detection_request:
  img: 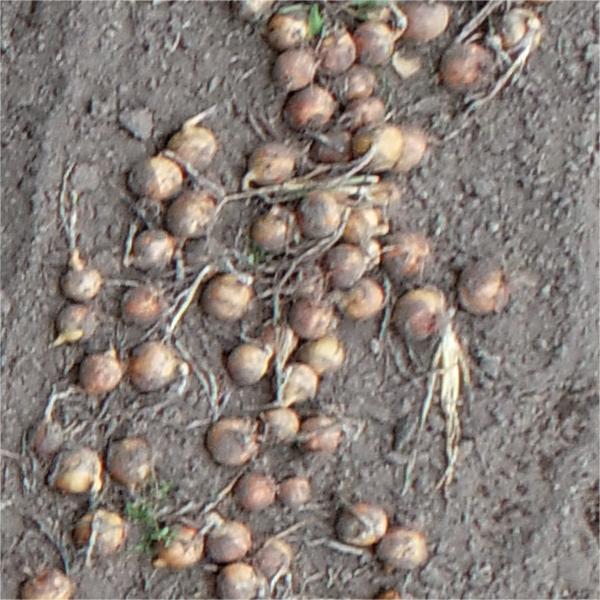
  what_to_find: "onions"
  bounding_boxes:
[52,304,99,343]
[391,284,446,344]
[203,274,253,322]
[251,207,294,250]
[263,323,298,356]
[492,8,532,51]
[49,440,101,492]
[205,416,258,466]
[21,567,73,599]
[340,279,384,318]
[79,354,120,395]
[457,260,506,314]
[27,419,64,460]
[311,126,351,163]
[327,243,370,286]
[318,30,356,70]
[353,20,397,64]
[340,208,376,247]
[299,334,344,375]
[256,405,300,443]
[167,125,215,172]
[255,537,293,579]
[338,501,385,547]
[338,65,375,100]
[84,511,126,554]
[300,415,342,455]
[217,560,260,597]
[236,0,267,29]
[440,42,491,91]
[290,295,337,337]
[357,125,401,171]
[275,47,316,88]
[167,187,222,239]
[248,139,299,186]
[262,10,307,50]
[382,227,431,286]
[392,132,430,170]
[343,94,382,128]
[365,3,405,39]
[208,520,250,563]
[288,84,335,128]
[225,342,266,383]
[130,229,172,270]
[398,2,446,43]
[374,589,418,600]
[279,475,310,505]
[279,366,319,406]
[376,527,429,571]
[134,155,184,201]
[60,266,101,300]
[129,341,183,392]
[297,191,342,238]
[105,435,156,486]
[156,523,201,569]
[236,473,274,511]
[123,284,163,323]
